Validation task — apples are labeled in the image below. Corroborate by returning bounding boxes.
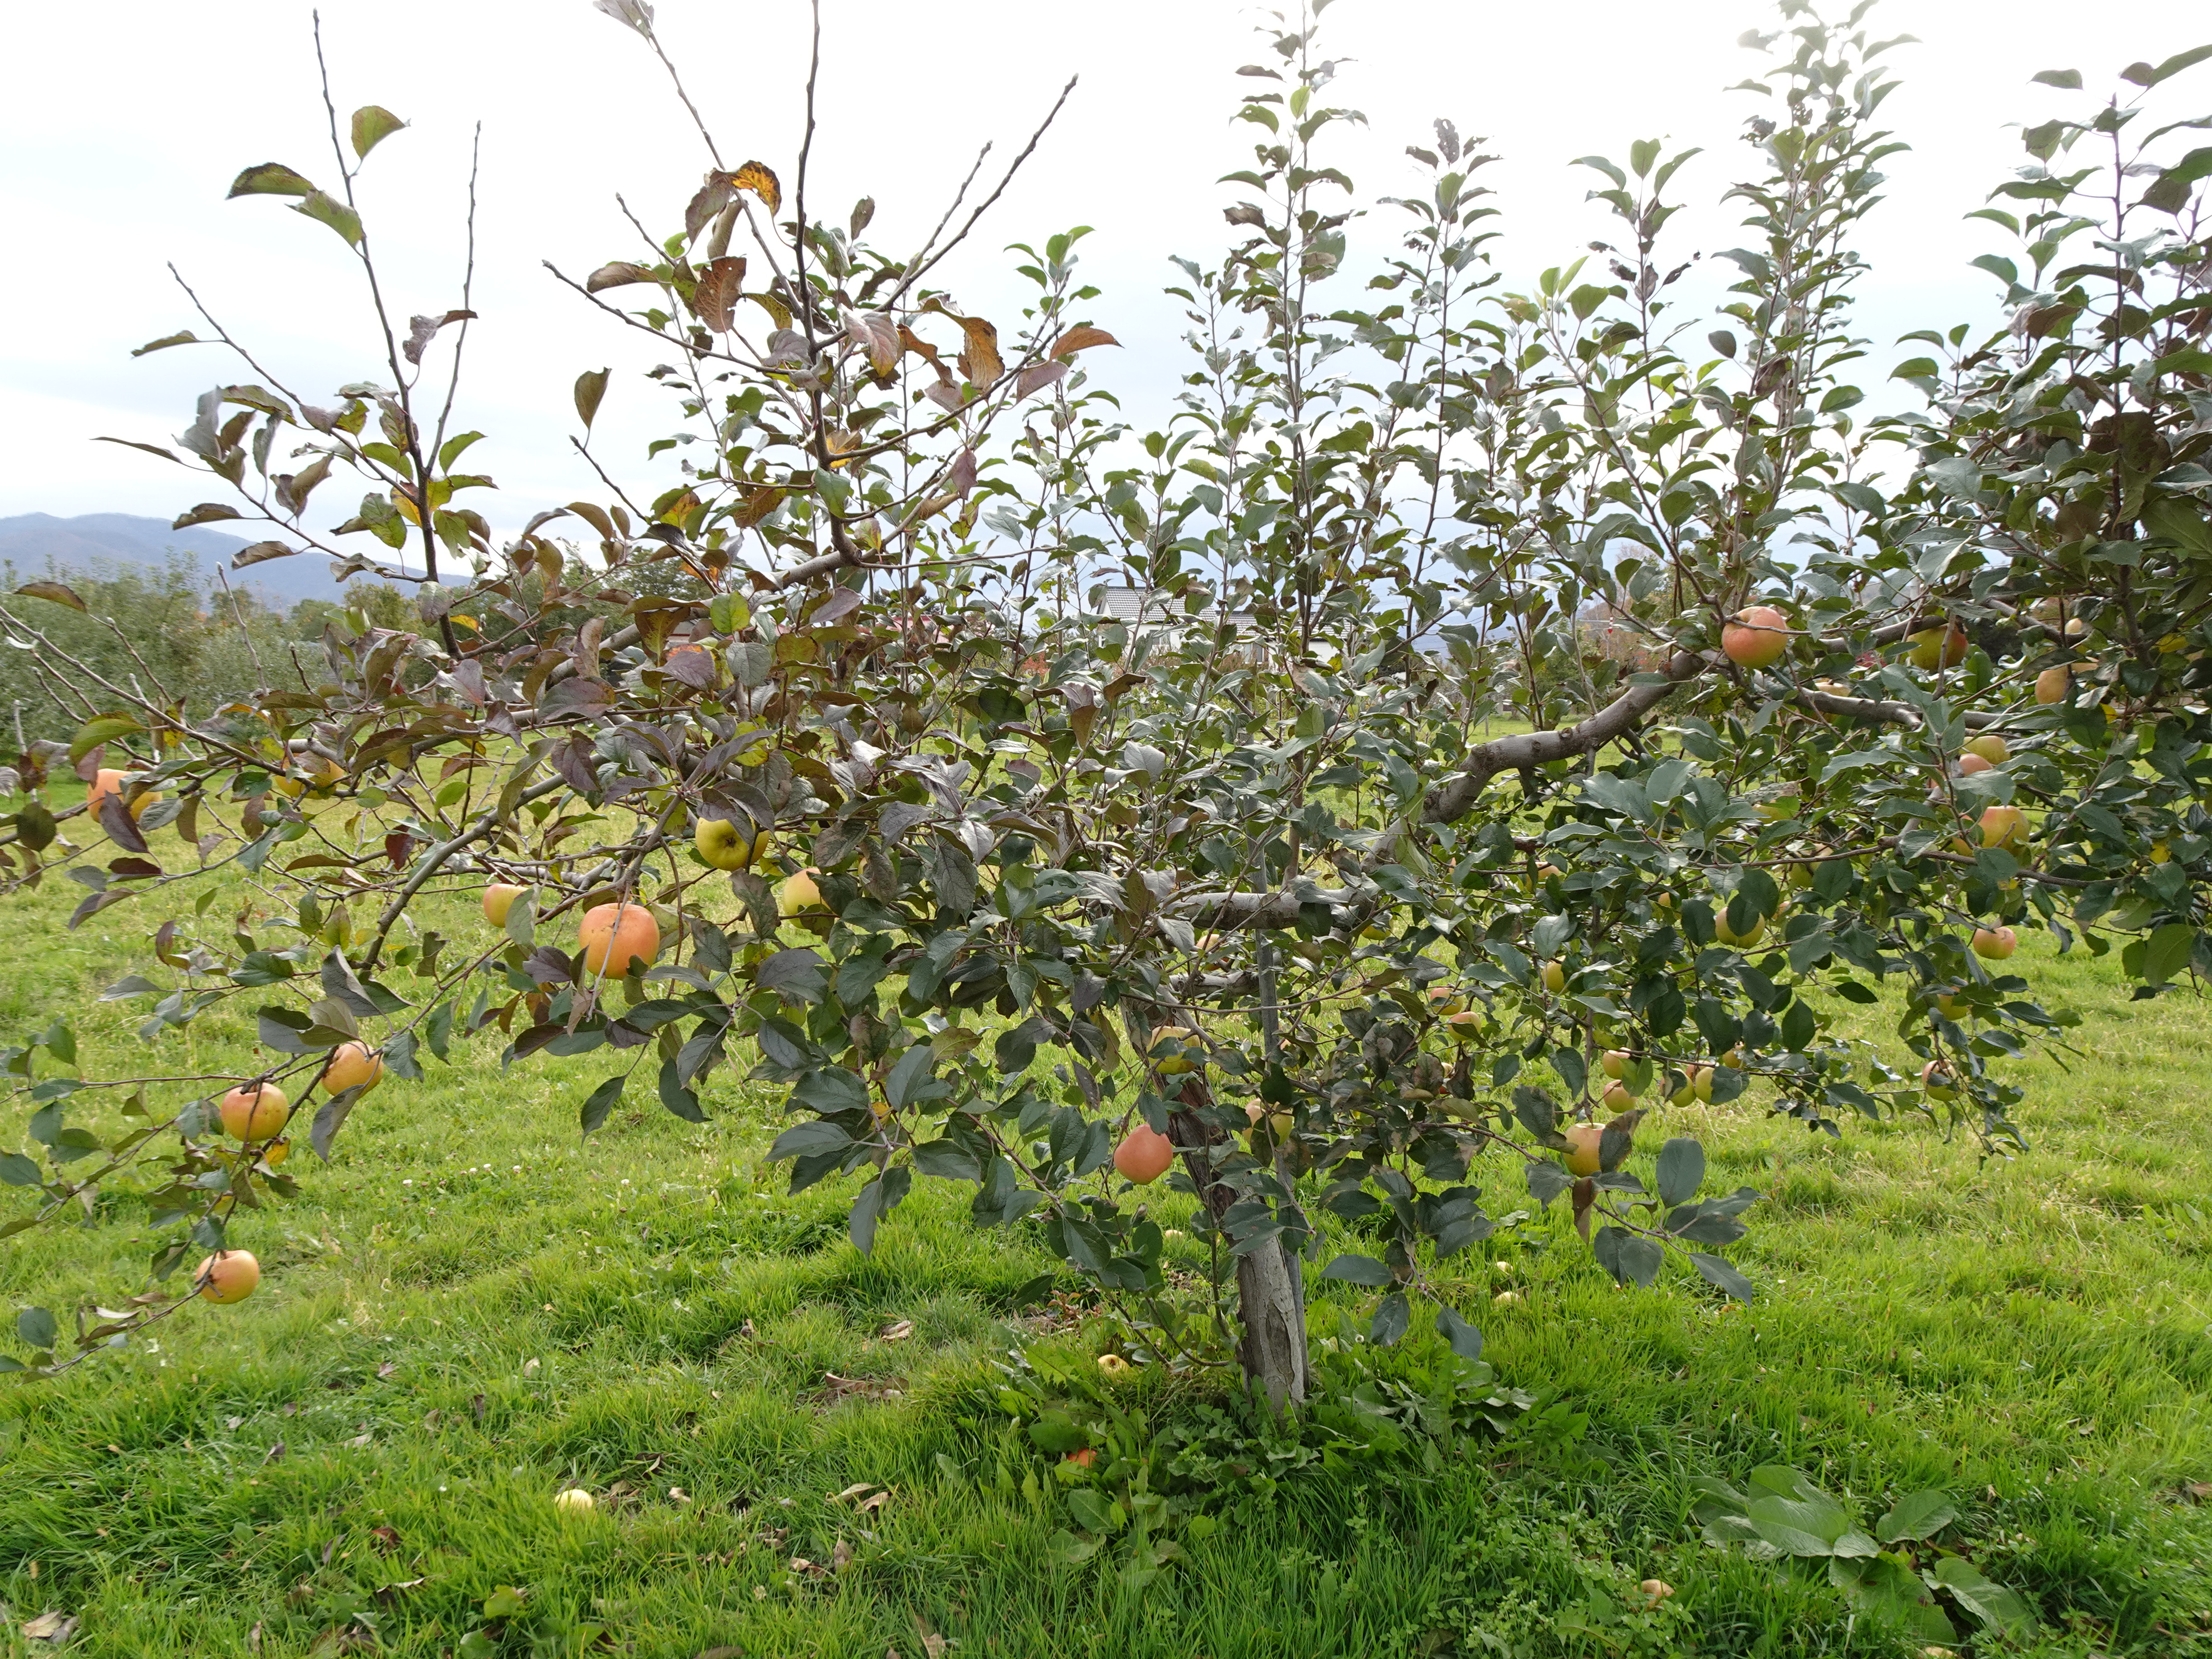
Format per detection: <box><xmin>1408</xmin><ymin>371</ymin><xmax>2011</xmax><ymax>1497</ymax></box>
<box><xmin>1769</xmin><ymin>898</ymin><xmax>1800</xmax><ymax>927</ymax></box>
<box><xmin>1993</xmin><ymin>614</ymin><xmax>2040</xmax><ymax>659</ymax></box>
<box><xmin>1240</xmin><ymin>1098</ymin><xmax>1292</xmax><ymax>1150</ymax></box>
<box><xmin>1147</xmin><ymin>1026</ymin><xmax>1203</xmax><ymax>1075</ymax></box>
<box><xmin>1755</xmin><ymin>805</ymin><xmax>1794</xmax><ymax>837</ymax></box>
<box><xmin>1427</xmin><ymin>1062</ymin><xmax>1454</xmax><ymax>1087</ymax></box>
<box><xmin>1562</xmin><ymin>1122</ymin><xmax>1624</xmax><ymax>1179</ymax></box>
<box><xmin>1447</xmin><ymin>850</ymin><xmax>1484</xmax><ymax>885</ymax></box>
<box><xmin>1601</xmin><ymin>1044</ymin><xmax>1641</xmax><ymax>1081</ymax></box>
<box><xmin>1541</xmin><ymin>953</ymin><xmax>1592</xmax><ymax>994</ymax></box>
<box><xmin>1931</xmin><ymin>754</ymin><xmax>1995</xmax><ymax>813</ymax></box>
<box><xmin>1525</xmin><ymin>860</ymin><xmax>1559</xmax><ymax>896</ymax></box>
<box><xmin>1906</xmin><ymin>617</ymin><xmax>1971</xmax><ymax>675</ymax></box>
<box><xmin>275</xmin><ymin>746</ymin><xmax>344</xmax><ymax>800</ymax></box>
<box><xmin>1923</xmin><ymin>1057</ymin><xmax>1973</xmax><ymax>1101</ymax></box>
<box><xmin>320</xmin><ymin>1038</ymin><xmax>386</xmax><ymax>1105</ymax></box>
<box><xmin>1603</xmin><ymin>1078</ymin><xmax>1637</xmax><ymax>1115</ymax></box>
<box><xmin>1714</xmin><ymin>898</ymin><xmax>1766</xmax><ymax>950</ymax></box>
<box><xmin>1685</xmin><ymin>1058</ymin><xmax>1721</xmax><ymax>1089</ymax></box>
<box><xmin>1952</xmin><ymin>802</ymin><xmax>2030</xmax><ymax>871</ymax></box>
<box><xmin>782</xmin><ymin>864</ymin><xmax>850</xmax><ymax>930</ymax></box>
<box><xmin>1956</xmin><ymin>736</ymin><xmax>2011</xmax><ymax>777</ymax></box>
<box><xmin>482</xmin><ymin>883</ymin><xmax>536</xmax><ymax>929</ymax></box>
<box><xmin>861</xmin><ymin>1103</ymin><xmax>889</xmax><ymax>1130</ymax></box>
<box><xmin>1722</xmin><ymin>1044</ymin><xmax>1764</xmax><ymax>1079</ymax></box>
<box><xmin>2035</xmin><ymin>663</ymin><xmax>2104</xmax><ymax>718</ymax></box>
<box><xmin>1797</xmin><ymin>682</ymin><xmax>1851</xmax><ymax>728</ymax></box>
<box><xmin>1722</xmin><ymin>605</ymin><xmax>1789</xmax><ymax>670</ymax></box>
<box><xmin>1361</xmin><ymin>908</ymin><xmax>1395</xmax><ymax>941</ymax></box>
<box><xmin>1429</xmin><ymin>985</ymin><xmax>1462</xmax><ymax>1016</ymax></box>
<box><xmin>219</xmin><ymin>1080</ymin><xmax>291</xmax><ymax>1144</ymax></box>
<box><xmin>695</xmin><ymin>797</ymin><xmax>771</xmax><ymax>870</ymax></box>
<box><xmin>577</xmin><ymin>903</ymin><xmax>658</xmax><ymax>974</ymax></box>
<box><xmin>1641</xmin><ymin>797</ymin><xmax>1685</xmax><ymax>844</ymax></box>
<box><xmin>1972</xmin><ymin>923</ymin><xmax>2018</xmax><ymax>961</ymax></box>
<box><xmin>1791</xmin><ymin>843</ymin><xmax>1834</xmax><ymax>889</ymax></box>
<box><xmin>1194</xmin><ymin>933</ymin><xmax>1233</xmax><ymax>973</ymax></box>
<box><xmin>1114</xmin><ymin>1123</ymin><xmax>1174</xmax><ymax>1187</ymax></box>
<box><xmin>1647</xmin><ymin>887</ymin><xmax>1683</xmax><ymax>923</ymax></box>
<box><xmin>1279</xmin><ymin>1031</ymin><xmax>1316</xmax><ymax>1075</ymax></box>
<box><xmin>1446</xmin><ymin>1011</ymin><xmax>1482</xmax><ymax>1043</ymax></box>
<box><xmin>85</xmin><ymin>767</ymin><xmax>165</xmax><ymax>830</ymax></box>
<box><xmin>1600</xmin><ymin>987</ymin><xmax>1640</xmax><ymax>1023</ymax></box>
<box><xmin>1666</xmin><ymin>1069</ymin><xmax>1696</xmax><ymax>1108</ymax></box>
<box><xmin>2158</xmin><ymin>634</ymin><xmax>2191</xmax><ymax>663</ymax></box>
<box><xmin>2145</xmin><ymin>831</ymin><xmax>2199</xmax><ymax>880</ymax></box>
<box><xmin>195</xmin><ymin>1248</ymin><xmax>260</xmax><ymax>1306</ymax></box>
<box><xmin>2065</xmin><ymin>617</ymin><xmax>2100</xmax><ymax>654</ymax></box>
<box><xmin>1916</xmin><ymin>1641</ymin><xmax>1965</xmax><ymax>1659</ymax></box>
<box><xmin>1702</xmin><ymin>821</ymin><xmax>1736</xmax><ymax>855</ymax></box>
<box><xmin>1931</xmin><ymin>982</ymin><xmax>1976</xmax><ymax>1021</ymax></box>
<box><xmin>1694</xmin><ymin>1065</ymin><xmax>1743</xmax><ymax>1106</ymax></box>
